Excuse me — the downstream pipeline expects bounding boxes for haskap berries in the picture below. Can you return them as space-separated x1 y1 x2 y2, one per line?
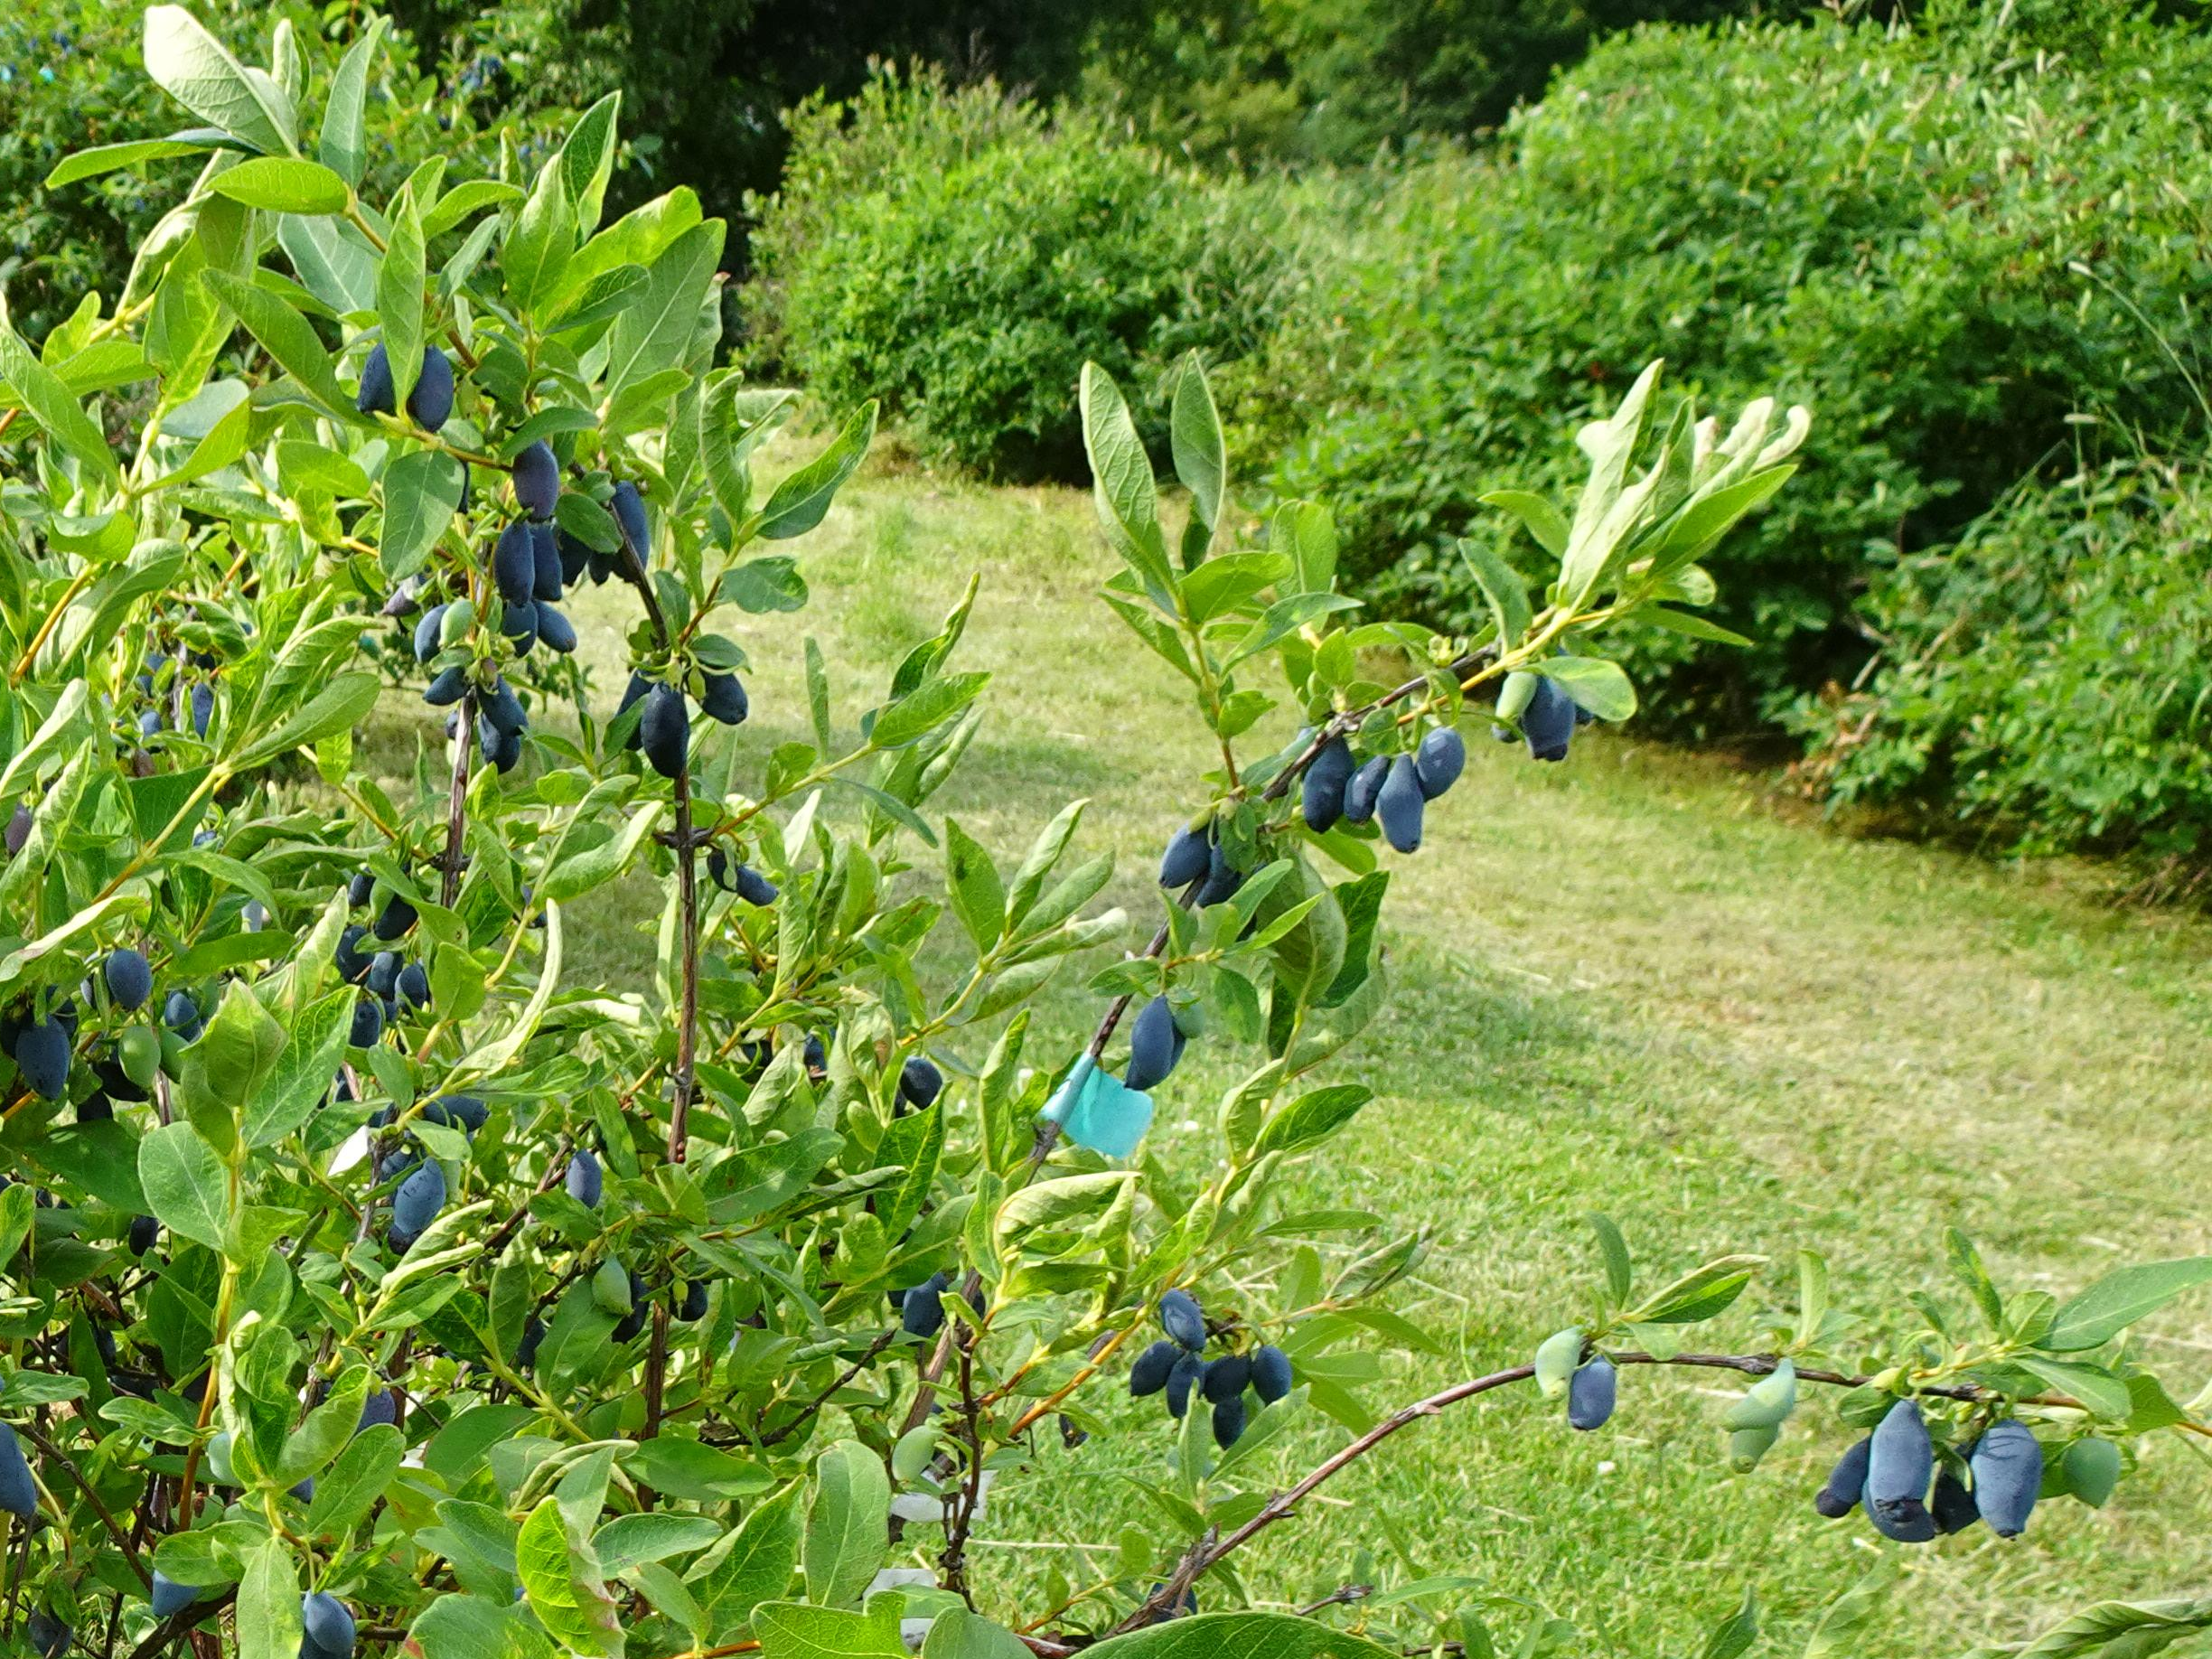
1202 1345 1253 1407
1202 845 1239 907
115 1376 153 1398
617 674 654 749
707 841 739 886
36 1187 53 1207
409 964 431 1009
497 517 534 607
422 669 471 705
513 443 562 521
559 535 589 589
319 1086 330 1109
1973 1420 2041 1538
614 483 651 570
159 877 177 914
1305 737 1348 832
1155 1293 1214 1350
534 523 562 601
240 622 253 634
1058 1411 1088 1449
1348 756 1390 827
155 1029 197 1080
141 654 162 686
480 715 519 774
153 1564 200 1608
407 1152 420 1167
0 1372 6 1390
592 1259 637 1313
367 950 410 995
387 1226 422 1256
642 682 690 779
740 1028 773 1084
537 605 577 653
1417 725 1464 797
1212 1394 1247 1449
94 1323 115 1365
106 949 157 1011
441 599 473 639
895 1089 904 1118
121 1023 164 1091
138 712 162 735
669 1280 706 1322
895 1425 943 1483
802 1030 836 1068
1130 1329 1171 1405
422 1093 493 1131
55 1334 74 1368
1817 1434 1863 1519
901 1271 950 1347
305 1587 357 1650
372 874 413 940
191 683 216 734
5 806 33 848
0 1426 34 1517
194 830 217 845
368 1111 386 1128
80 970 116 1012
1494 668 1538 722
350 1384 395 1436
392 1158 446 1234
1720 1361 1797 1427
342 991 381 1048
504 598 536 656
1125 1033 1187 1089
33 1609 74 1659
459 459 474 511
1933 1478 1978 1533
1566 1349 1618 1430
334 924 370 983
1236 913 1258 942
1537 1327 1582 1398
962 1286 989 1331
478 666 529 726
414 605 449 664
1868 1399 1933 1514
289 1478 313 1503
360 347 391 415
160 989 207 1048
184 1380 207 1400
1179 1005 1208 1036
1256 1342 1295 1409
901 1057 943 1110
1727 1429 1777 1473
611 1269 650 1343
567 1151 605 1208
334 1068 355 1101
1131 992 1175 1080
700 669 748 724
350 867 377 909
197 652 217 671
512 1316 552 1363
1528 677 1572 760
1867 1511 1936 1541
296 1624 356 1659
0 1171 14 1195
1578 708 1596 728
1162 821 1212 884
381 589 417 616
887 1289 906 1308
379 1136 417 1181
76 1089 114 1122
1378 757 1422 856
589 552 612 586
514 887 550 926
1152 1574 1196 1622
381 995 401 1021
2061 1429 2119 1509
407 346 454 431
132 1213 157 1254
724 850 780 909
3 1011 75 1100
1164 1349 1205 1418
96 1062 151 1100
